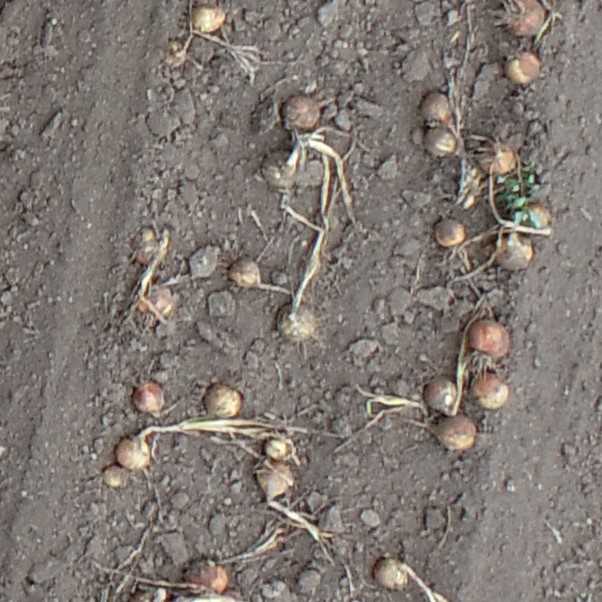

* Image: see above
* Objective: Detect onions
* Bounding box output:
[225,255,258,288]
[419,92,449,122]
[161,38,186,66]
[260,154,292,189]
[429,413,474,451]
[466,320,507,358]
[131,382,162,411]
[130,226,161,264]
[276,305,315,342]
[526,207,550,228]
[263,435,289,459]
[506,52,541,83]
[423,378,457,413]
[436,216,467,246]
[116,432,152,469]
[201,383,241,419]
[280,94,318,130]
[140,286,173,320]
[255,462,291,498]
[478,147,516,173]
[470,374,506,411]
[190,4,224,34]
[189,562,226,594]
[504,0,543,37]
[372,556,406,587]
[426,125,456,154]
[103,466,127,488]
[493,238,532,268]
